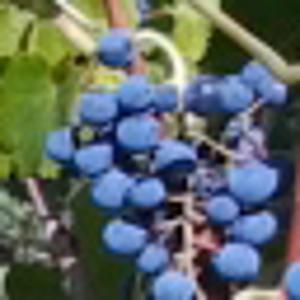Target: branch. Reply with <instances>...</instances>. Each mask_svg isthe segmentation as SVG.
Here are the masks:
<instances>
[{
  "label": "branch",
  "mask_w": 300,
  "mask_h": 300,
  "mask_svg": "<svg viewBox=\"0 0 300 300\" xmlns=\"http://www.w3.org/2000/svg\"><path fill=\"white\" fill-rule=\"evenodd\" d=\"M105 6L108 11L106 22L113 29H126L129 35L135 39L134 43V61L126 67V73L132 78H140L145 75V66L143 65V47L144 39L140 37V32L130 14L125 12L122 0H105Z\"/></svg>",
  "instance_id": "branch-1"
}]
</instances>
